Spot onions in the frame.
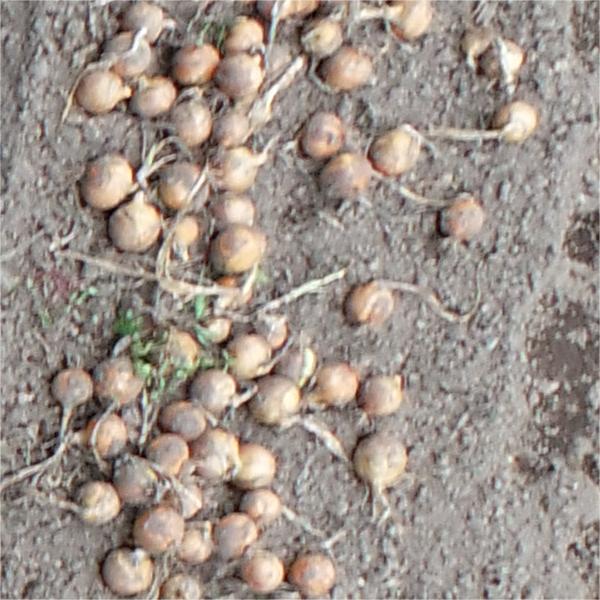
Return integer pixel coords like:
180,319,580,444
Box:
214,512,255,557
358,375,401,415
170,93,216,140
181,452,231,483
461,28,494,66
256,310,288,348
313,361,357,404
288,551,337,594
279,346,316,383
162,479,203,517
121,4,166,44
230,332,272,377
108,198,160,249
303,113,345,157
241,488,278,523
250,373,300,422
220,146,263,189
161,402,208,440
112,29,152,77
344,283,392,325
194,431,238,479
95,360,142,404
74,69,125,112
241,550,282,591
233,444,275,487
224,20,262,55
218,192,255,227
495,100,538,144
158,162,202,207
173,44,217,84
80,155,131,206
50,369,93,418
161,570,199,599
73,479,119,524
133,506,183,553
110,457,159,505
216,274,242,294
320,151,370,200
103,547,152,592
133,77,176,118
494,39,526,84
386,3,432,41
89,412,132,460
190,369,238,416
352,432,409,483
437,196,485,240
163,213,201,248
173,525,215,563
371,125,421,174
214,110,250,146
321,46,370,91
212,224,264,273
161,329,205,375
214,53,261,95
257,0,318,19
145,435,190,477
303,18,341,55
199,315,230,343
